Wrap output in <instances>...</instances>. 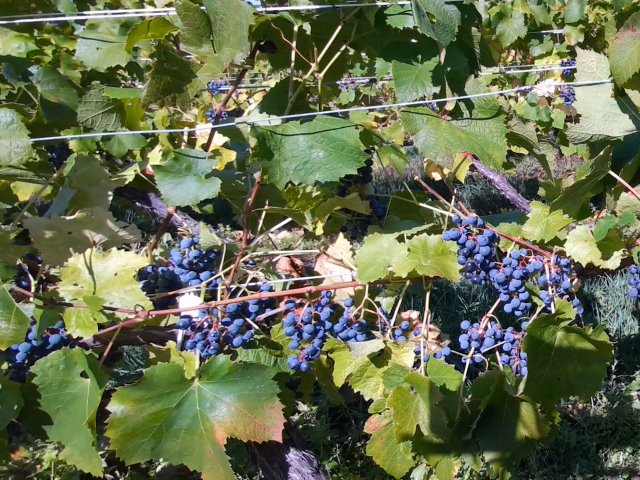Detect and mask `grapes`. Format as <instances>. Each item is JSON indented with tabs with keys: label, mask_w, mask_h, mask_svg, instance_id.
<instances>
[{
	"label": "grapes",
	"mask_w": 640,
	"mask_h": 480,
	"mask_svg": "<svg viewBox=\"0 0 640 480\" xmlns=\"http://www.w3.org/2000/svg\"><path fill=\"white\" fill-rule=\"evenodd\" d=\"M485 220L481 217L469 216L462 218L460 215H453L451 223H458L459 226H466L462 230L452 228L446 230L442 234L444 241L457 240V246L460 248L457 263L465 265V279H471L472 284L486 285L485 278H490L493 289L499 293V299L505 303L502 311L506 314H512L514 317H520L525 310L532 308L530 293L526 291V286L522 284L521 278L526 273L533 274L543 270V255H537L533 263L527 265H518V261L522 256L528 255V250L521 248L519 251H512L510 257H503L502 262L507 265L503 268V273H499L501 265L495 262L493 257L496 254V242L499 234L492 229H485L483 235L476 236L474 240H468L465 235L471 230L470 226L483 227Z\"/></svg>",
	"instance_id": "grapes-1"
},
{
	"label": "grapes",
	"mask_w": 640,
	"mask_h": 480,
	"mask_svg": "<svg viewBox=\"0 0 640 480\" xmlns=\"http://www.w3.org/2000/svg\"><path fill=\"white\" fill-rule=\"evenodd\" d=\"M321 300L311 306H307L304 309L303 316L296 314L293 311L286 313V318L283 320V335L285 337H293V341L288 344L291 350H296L300 346L301 340H311V346L300 351V357L298 355H290L287 358L289 362V368L291 370H301L303 373H307L311 369V361L316 360L321 355V348L323 347L322 337L330 329L340 340L344 342H357L366 341L368 335L364 333V327L367 325V321L364 318H360L353 323L348 322V318L353 315L351 309L344 310L342 315L336 323L328 320L334 310L328 305L331 303L330 298L333 296L331 290H322L320 292Z\"/></svg>",
	"instance_id": "grapes-2"
},
{
	"label": "grapes",
	"mask_w": 640,
	"mask_h": 480,
	"mask_svg": "<svg viewBox=\"0 0 640 480\" xmlns=\"http://www.w3.org/2000/svg\"><path fill=\"white\" fill-rule=\"evenodd\" d=\"M199 244L198 237L182 238L179 241V246L189 251L186 253V257L180 249L172 248L169 251L170 264L173 268L159 267L155 264L141 267L136 273L141 290L147 294L161 291L173 292L181 290L184 283H187L188 287H192L210 279L216 274L213 267L214 260L217 259V256L222 255V251L191 249L194 245L198 246Z\"/></svg>",
	"instance_id": "grapes-3"
},
{
	"label": "grapes",
	"mask_w": 640,
	"mask_h": 480,
	"mask_svg": "<svg viewBox=\"0 0 640 480\" xmlns=\"http://www.w3.org/2000/svg\"><path fill=\"white\" fill-rule=\"evenodd\" d=\"M479 327V322L474 323L470 320H461L459 322V329L465 331V333H460L457 337L459 349L466 351L471 347L476 349L473 351L474 355H481L487 348L505 340L502 350L506 354L499 356V364L501 366L510 365L511 372L515 371L519 377H525L528 373V354L526 352L516 354V349L519 347L521 340L514 338L516 334L514 327L509 326L502 331L496 321H491L490 328H487L481 334L477 333Z\"/></svg>",
	"instance_id": "grapes-4"
},
{
	"label": "grapes",
	"mask_w": 640,
	"mask_h": 480,
	"mask_svg": "<svg viewBox=\"0 0 640 480\" xmlns=\"http://www.w3.org/2000/svg\"><path fill=\"white\" fill-rule=\"evenodd\" d=\"M37 324L31 322L27 333L25 334L26 342L11 344L9 349L4 353L6 362L12 364V368H17L11 372L9 380L18 383H27L26 373L36 360L47 355L62 339L68 340L65 334L63 320H58L55 326H49V330H58L53 335L43 334L38 340H35Z\"/></svg>",
	"instance_id": "grapes-5"
},
{
	"label": "grapes",
	"mask_w": 640,
	"mask_h": 480,
	"mask_svg": "<svg viewBox=\"0 0 640 480\" xmlns=\"http://www.w3.org/2000/svg\"><path fill=\"white\" fill-rule=\"evenodd\" d=\"M275 305L276 299L273 297L226 304L225 311L229 317H223L220 320L221 325L228 326V330L223 336V343L230 344L232 348H240L244 341L250 340L253 337L256 331L253 325H246L245 333L239 332V328H242L245 324V319L240 317V312L248 317L250 321H253L257 318V313L260 311L269 313L275 309Z\"/></svg>",
	"instance_id": "grapes-6"
},
{
	"label": "grapes",
	"mask_w": 640,
	"mask_h": 480,
	"mask_svg": "<svg viewBox=\"0 0 640 480\" xmlns=\"http://www.w3.org/2000/svg\"><path fill=\"white\" fill-rule=\"evenodd\" d=\"M201 324L200 320L193 321V316L189 314L181 315L176 322L178 329H188L194 333L192 338H187L183 343L185 350L198 349L200 357L207 359L208 356H214L220 350V344L217 343L221 337L220 331H211L206 328L205 324Z\"/></svg>",
	"instance_id": "grapes-7"
},
{
	"label": "grapes",
	"mask_w": 640,
	"mask_h": 480,
	"mask_svg": "<svg viewBox=\"0 0 640 480\" xmlns=\"http://www.w3.org/2000/svg\"><path fill=\"white\" fill-rule=\"evenodd\" d=\"M553 263L555 265L561 266L560 267L561 271L552 272L549 275V278L546 273H542L537 278V284L539 286H544L548 282L551 285L561 284L560 286H557L555 288V292L557 294H561V293L567 294L569 292V289L572 287V283L569 281V277L567 276L572 268V265L570 264V259L568 257H561L560 255H555L553 258Z\"/></svg>",
	"instance_id": "grapes-8"
},
{
	"label": "grapes",
	"mask_w": 640,
	"mask_h": 480,
	"mask_svg": "<svg viewBox=\"0 0 640 480\" xmlns=\"http://www.w3.org/2000/svg\"><path fill=\"white\" fill-rule=\"evenodd\" d=\"M629 274L631 276L628 278V284L634 286L629 290V298L635 300L640 297V265L632 264L629 267Z\"/></svg>",
	"instance_id": "grapes-9"
},
{
	"label": "grapes",
	"mask_w": 640,
	"mask_h": 480,
	"mask_svg": "<svg viewBox=\"0 0 640 480\" xmlns=\"http://www.w3.org/2000/svg\"><path fill=\"white\" fill-rule=\"evenodd\" d=\"M411 323L409 321H401L400 328H394L392 331V340L393 341H406L407 337L404 336V330L409 329Z\"/></svg>",
	"instance_id": "grapes-10"
},
{
	"label": "grapes",
	"mask_w": 640,
	"mask_h": 480,
	"mask_svg": "<svg viewBox=\"0 0 640 480\" xmlns=\"http://www.w3.org/2000/svg\"><path fill=\"white\" fill-rule=\"evenodd\" d=\"M378 310L382 313V316H383V317H385V319H386V321L388 322V324H391L392 319H390V318L388 317L389 312H388V311H386V309H385L383 306H379V307H378Z\"/></svg>",
	"instance_id": "grapes-11"
}]
</instances>
